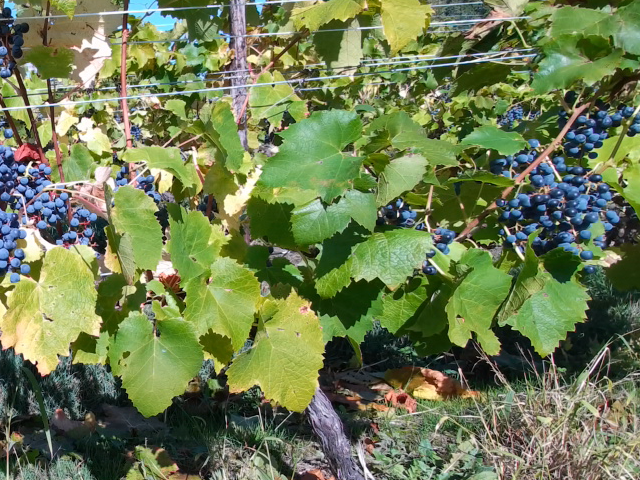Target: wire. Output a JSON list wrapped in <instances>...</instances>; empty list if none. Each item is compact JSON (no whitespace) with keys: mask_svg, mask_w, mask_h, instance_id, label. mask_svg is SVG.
<instances>
[{"mask_svg":"<svg viewBox=\"0 0 640 480\" xmlns=\"http://www.w3.org/2000/svg\"><path fill=\"white\" fill-rule=\"evenodd\" d=\"M300 0H279V1H242L233 2L226 5H187V6H164V7H152L142 9H111V10H99L93 12H79L75 13V18L81 17H95L102 15H114V14H144L154 12H167V11H189V10H228L236 7L244 6H281L285 4H297Z\"/></svg>","mask_w":640,"mask_h":480,"instance_id":"2","label":"wire"},{"mask_svg":"<svg viewBox=\"0 0 640 480\" xmlns=\"http://www.w3.org/2000/svg\"><path fill=\"white\" fill-rule=\"evenodd\" d=\"M538 53H526V54H517V55H504L500 57H495L492 59H474V60H457V61H447V62H435L428 63L423 65L411 66V67H402V68H393V69H374L365 72H356V73H343V74H334V75H313V76H299L295 78H286L281 80H270L265 82H259L254 84L247 85H235V86H213L206 88H195V89H181L174 90L168 92H148V93H139L135 95H120L115 97H100L97 99H79V100H68V101H57L48 104H37V105H23V106H7L1 107L0 113L9 112V111H25V110H40V109H50L54 107L60 106H70V105H82V104H99L102 102H117L122 100H138L141 98H151V97H170L176 95H184V94H197V93H208V92H216V91H237V90H249V89H257L261 87L267 86H275V85H283L288 83H297L301 81H315V80H336V79H345V78H358V77H368L376 74H395V73H411L413 71L425 70L430 68L437 67H450V66H459V65H476V64H494L497 62L507 61V60H519V59H529V58H538Z\"/></svg>","mask_w":640,"mask_h":480,"instance_id":"1","label":"wire"},{"mask_svg":"<svg viewBox=\"0 0 640 480\" xmlns=\"http://www.w3.org/2000/svg\"><path fill=\"white\" fill-rule=\"evenodd\" d=\"M68 17H69L68 13H63L58 15L10 16V17H0V22L60 20Z\"/></svg>","mask_w":640,"mask_h":480,"instance_id":"3","label":"wire"}]
</instances>
